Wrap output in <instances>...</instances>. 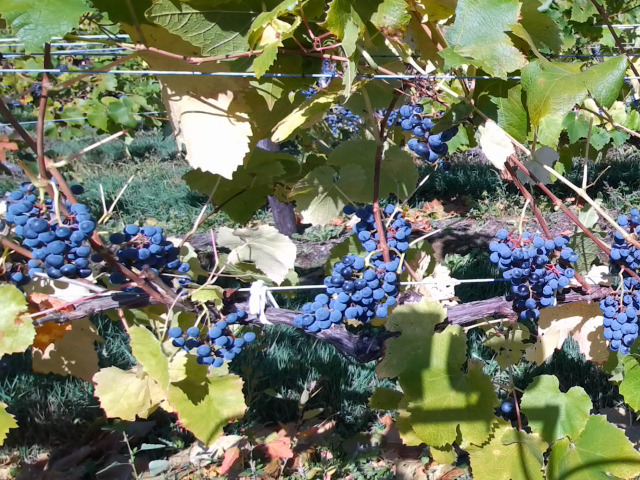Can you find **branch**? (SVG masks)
<instances>
[{
  "instance_id": "30e6481e",
  "label": "branch",
  "mask_w": 640,
  "mask_h": 480,
  "mask_svg": "<svg viewBox=\"0 0 640 480\" xmlns=\"http://www.w3.org/2000/svg\"><path fill=\"white\" fill-rule=\"evenodd\" d=\"M49 83L50 75L44 74L42 81V93H41V106L39 116L37 120V141L34 142L29 136L25 128L17 121V119L9 112L7 106L0 103V111L3 116L12 124V126L18 131L20 136L24 139L27 145L33 149L36 154V168L38 173V183L44 188L45 192L51 199H55V193L53 188L45 180V171L50 174L51 178L56 182L59 190L68 197L71 203L77 201L75 194L68 189L66 182L63 179L57 166L50 160V157L43 152V139H44V123L48 108V96H49Z\"/></svg>"
},
{
  "instance_id": "325d2c04",
  "label": "branch",
  "mask_w": 640,
  "mask_h": 480,
  "mask_svg": "<svg viewBox=\"0 0 640 480\" xmlns=\"http://www.w3.org/2000/svg\"><path fill=\"white\" fill-rule=\"evenodd\" d=\"M67 38L70 40H76L79 42H87V43L99 44V45H104L109 47H131V48L145 49L151 53L169 56V57H172L173 59H180L181 61H185L189 63H198V62L217 60V59L241 58V57L253 56L256 54L263 53L262 49H254L251 51H244V52H238V53L215 54V55H207L202 57H194L190 55L176 54L175 52L154 48L152 46H149L147 44H142V43L111 42V41H106V40H101L96 38L81 37L78 35H73L71 33L67 34Z\"/></svg>"
},
{
  "instance_id": "170604dd",
  "label": "branch",
  "mask_w": 640,
  "mask_h": 480,
  "mask_svg": "<svg viewBox=\"0 0 640 480\" xmlns=\"http://www.w3.org/2000/svg\"><path fill=\"white\" fill-rule=\"evenodd\" d=\"M406 89H407L406 85H401L394 92L393 101L391 102V104L387 108V111H386V114L384 116V119L382 120V123L380 125V129H379V146L377 147L376 158H375V166H374V188H375V194H374V199H373V213H374V218L376 220L378 237H379V240H380V244H381L382 251H383V257H384L385 261H389L390 257L388 255L387 244L385 242V237H384L383 230H382L381 218H380L379 211H378V201H379V197H380L379 168H380L381 154H382V151L384 150V131H385V127L387 126V123H388V121L390 119V116H391V113H392L394 107L398 103L399 94L402 93Z\"/></svg>"
},
{
  "instance_id": "45aa463d",
  "label": "branch",
  "mask_w": 640,
  "mask_h": 480,
  "mask_svg": "<svg viewBox=\"0 0 640 480\" xmlns=\"http://www.w3.org/2000/svg\"><path fill=\"white\" fill-rule=\"evenodd\" d=\"M505 136L515 145L517 146L519 149H521L523 152H525L528 156H530L535 162H538L540 164L541 167H543L545 170H547L549 173H551L554 177L558 178L560 181H562L563 183H565L566 185H568L573 191H576L578 194H580L583 198H585L587 200V202L596 210L598 211L603 217H605L609 223L614 227V229L622 234L623 236H625V238L628 241L632 240V236L629 234L628 231L624 230L623 228H621L617 222L603 209L601 208L598 204H596V202L591 198L590 195H588L583 189L579 188L578 186H576L573 182H571L568 178L564 177L562 174L558 173L557 171H555L552 167H550L546 162H544L540 157H538L534 152H532L529 148L525 147L523 144H521L519 141H517L515 139V137L509 132L506 131L505 132Z\"/></svg>"
},
{
  "instance_id": "982ccf7c",
  "label": "branch",
  "mask_w": 640,
  "mask_h": 480,
  "mask_svg": "<svg viewBox=\"0 0 640 480\" xmlns=\"http://www.w3.org/2000/svg\"><path fill=\"white\" fill-rule=\"evenodd\" d=\"M509 157L511 158V160L518 166L520 167L524 173L529 176L533 181H535L542 189H544L548 195L557 203V205L561 208V210L563 212H565L567 214V216L574 221L578 226H580L583 231L585 232V234L596 244L598 245L601 249H603L605 252H609L610 248L605 245L602 241H600L598 238L595 237V235L589 230V228L578 218L576 217L572 211L567 208L565 206V204L558 198L557 195H555V193L551 190V188L549 186H547L546 184H544V182L538 178L533 172H531L527 166H525L517 157L514 153H510Z\"/></svg>"
},
{
  "instance_id": "1ff4a987",
  "label": "branch",
  "mask_w": 640,
  "mask_h": 480,
  "mask_svg": "<svg viewBox=\"0 0 640 480\" xmlns=\"http://www.w3.org/2000/svg\"><path fill=\"white\" fill-rule=\"evenodd\" d=\"M89 243L95 252L103 257L113 268L117 271L126 274L129 278L134 280L137 284H139L148 294L154 296L156 299H160V294L155 291L145 280H143L139 275H137L134 271L128 268L125 265H121L118 263L109 253L108 251L100 244L98 241V232L93 230L88 234Z\"/></svg>"
},
{
  "instance_id": "ea751061",
  "label": "branch",
  "mask_w": 640,
  "mask_h": 480,
  "mask_svg": "<svg viewBox=\"0 0 640 480\" xmlns=\"http://www.w3.org/2000/svg\"><path fill=\"white\" fill-rule=\"evenodd\" d=\"M504 165L506 166V168H507V170H508L509 174L511 175L512 181H513L514 185L516 186V188H517L520 192H522V193H523V194L528 198V200H529V202H530V204H531L532 210H533V212H534V214H535L536 218L539 220V222H540V224H541L542 228H543V229H544V231H545V235L547 236V239H548V240H551V239L553 238V233L551 232V230H550V228L548 227V225H547V223H546L545 219L543 218V216L541 215L540 211L538 210V207H537V204H536V202H535L534 197L532 196V194H531L528 190H526V189H525V188L520 184V182H519V180H518V178H517V175H516V173H515V171H514L513 167L511 166L510 162H509V161H505V162H504Z\"/></svg>"
},
{
  "instance_id": "ca6c30ca",
  "label": "branch",
  "mask_w": 640,
  "mask_h": 480,
  "mask_svg": "<svg viewBox=\"0 0 640 480\" xmlns=\"http://www.w3.org/2000/svg\"><path fill=\"white\" fill-rule=\"evenodd\" d=\"M430 83L437 88H441L446 93L452 94L455 97H457L459 101L463 102L470 110L474 111L475 114L478 115L482 121L487 120L486 114L482 113L475 105H473L468 99L463 97L457 90L449 88L444 83H439L436 80H430Z\"/></svg>"
},
{
  "instance_id": "1d269e1b",
  "label": "branch",
  "mask_w": 640,
  "mask_h": 480,
  "mask_svg": "<svg viewBox=\"0 0 640 480\" xmlns=\"http://www.w3.org/2000/svg\"><path fill=\"white\" fill-rule=\"evenodd\" d=\"M279 52L280 53H284V54L306 55V56H310L312 58L335 60V61H339V62H345L346 61L345 57H341V56H338V55L315 53V52H312V51H309V50H297V49L280 48Z\"/></svg>"
},
{
  "instance_id": "1af6ec82",
  "label": "branch",
  "mask_w": 640,
  "mask_h": 480,
  "mask_svg": "<svg viewBox=\"0 0 640 480\" xmlns=\"http://www.w3.org/2000/svg\"><path fill=\"white\" fill-rule=\"evenodd\" d=\"M401 83L407 84L409 86H411L412 88L418 90L419 92H421L423 95H425L427 98L433 99V101L448 107L449 103L442 99L437 97L435 94H432L431 92H428L426 89H424L422 86H420L419 84L409 80V79H398Z\"/></svg>"
},
{
  "instance_id": "2b1400db",
  "label": "branch",
  "mask_w": 640,
  "mask_h": 480,
  "mask_svg": "<svg viewBox=\"0 0 640 480\" xmlns=\"http://www.w3.org/2000/svg\"><path fill=\"white\" fill-rule=\"evenodd\" d=\"M0 241L11 250L22 253L25 256H29L31 254V251L28 248L14 243L13 241L9 240L4 234H0Z\"/></svg>"
},
{
  "instance_id": "8bde2521",
  "label": "branch",
  "mask_w": 640,
  "mask_h": 480,
  "mask_svg": "<svg viewBox=\"0 0 640 480\" xmlns=\"http://www.w3.org/2000/svg\"><path fill=\"white\" fill-rule=\"evenodd\" d=\"M405 60L410 64V66L416 70L417 72H419L420 74H425V70L423 68H421L420 66H418L417 64H415V62L413 61V59L410 56H406Z\"/></svg>"
}]
</instances>
